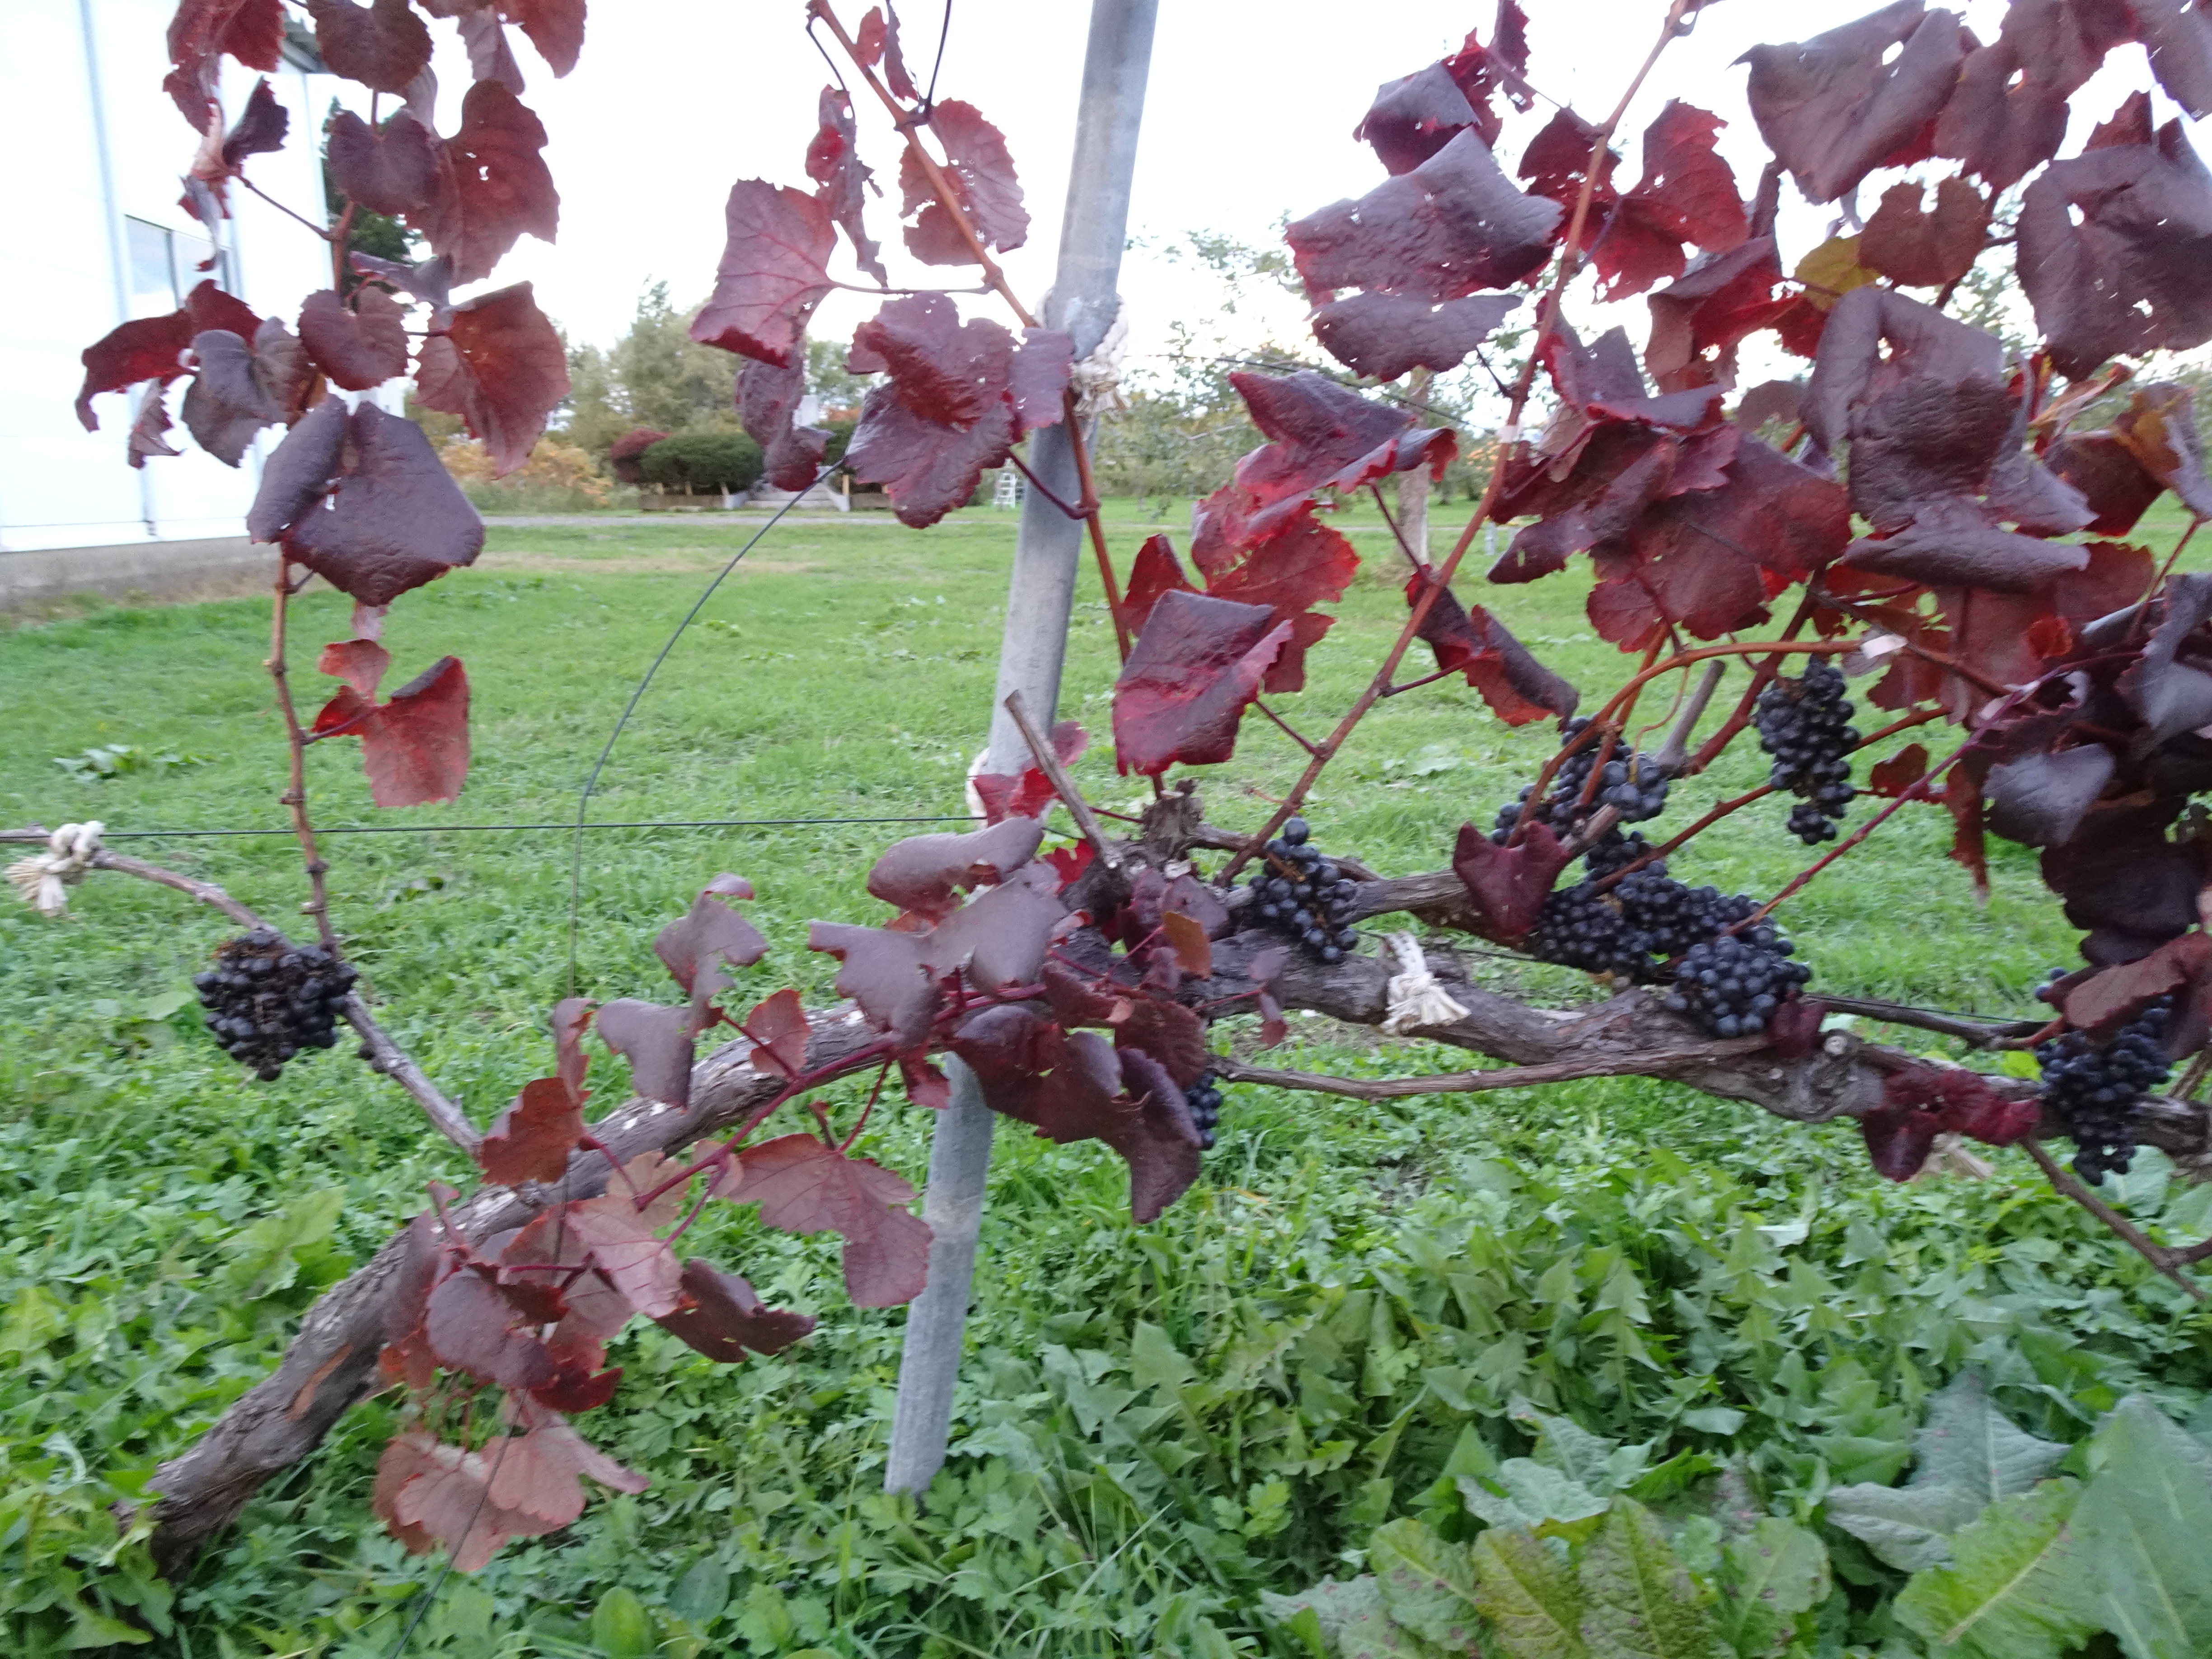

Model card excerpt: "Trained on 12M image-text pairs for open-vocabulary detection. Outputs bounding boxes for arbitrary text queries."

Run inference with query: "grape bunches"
[1614,876,1792,945]
[1747,657,1861,848]
[182,917,364,1084]
[1144,1032,1225,1156]
[2068,990,2175,1123]
[1525,880,1667,985]
[1583,821,1677,884]
[2030,960,2123,1029]
[1661,932,1822,1041]
[2032,1027,2144,1190]
[1249,818,1360,970]
[1485,715,1667,849]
